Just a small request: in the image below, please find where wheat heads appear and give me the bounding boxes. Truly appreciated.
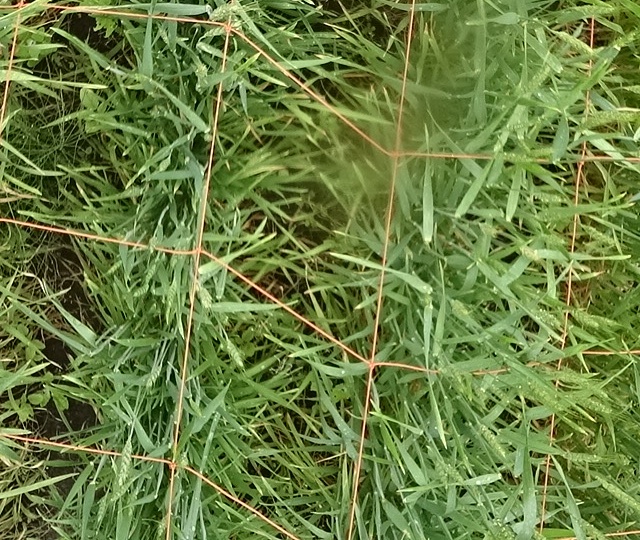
[529,382,564,409]
[563,450,602,463]
[158,155,171,170]
[552,31,593,53]
[485,381,507,402]
[606,32,635,51]
[190,400,202,413]
[181,454,188,470]
[200,22,241,42]
[151,233,157,255]
[535,211,571,222]
[169,282,177,305]
[508,115,539,131]
[448,362,464,382]
[134,284,151,299]
[448,298,474,318]
[157,512,169,531]
[117,442,132,484]
[447,463,467,487]
[533,191,562,202]
[521,67,550,94]
[592,110,635,122]
[126,187,142,196]
[495,518,511,540]
[92,497,108,518]
[569,2,614,17]
[198,286,213,310]
[569,507,606,540]
[495,151,538,164]
[573,371,612,399]
[170,238,190,265]
[145,262,155,278]
[551,369,590,384]
[542,230,566,246]
[625,83,640,94]
[518,245,542,263]
[571,308,596,330]
[529,310,560,328]
[476,252,507,272]
[114,479,134,499]
[207,5,239,20]
[604,480,639,506]
[108,261,125,274]
[192,65,210,81]
[157,28,168,43]
[227,341,240,367]
[482,423,512,460]
[146,367,160,381]
[591,311,617,326]
[129,488,140,512]
[572,393,611,414]
[582,225,614,245]
[433,461,451,486]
